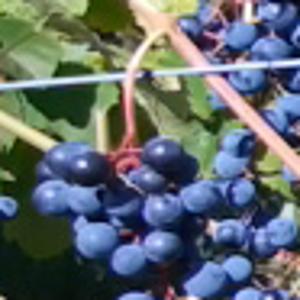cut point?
Instances as JSON below:
<instances>
[{
    "label": "cut point",
    "mask_w": 300,
    "mask_h": 300,
    "mask_svg": "<svg viewBox=\"0 0 300 300\" xmlns=\"http://www.w3.org/2000/svg\"><path fill=\"white\" fill-rule=\"evenodd\" d=\"M163 31L157 28L150 33H147L142 40L141 45L135 56L131 59L128 69L123 75V116H124V131L127 136H134L136 134V120H135V99L133 92L134 79L139 70L140 64L143 62L151 44L161 39Z\"/></svg>",
    "instance_id": "1"
}]
</instances>
